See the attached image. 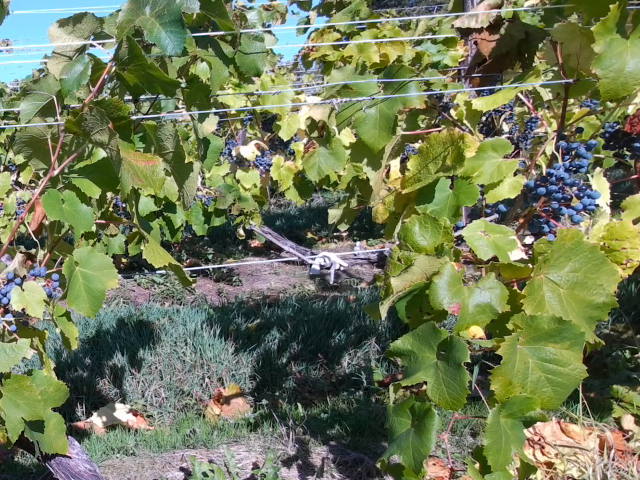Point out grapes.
<instances>
[{
  "instance_id": "01657485",
  "label": "grapes",
  "mask_w": 640,
  "mask_h": 480,
  "mask_svg": "<svg viewBox=\"0 0 640 480\" xmlns=\"http://www.w3.org/2000/svg\"><path fill=\"white\" fill-rule=\"evenodd\" d=\"M598 146L596 140L586 141L583 145L580 141L570 143L569 141H558L557 147L564 150L565 153L562 156L563 163H554L552 168L546 169V175L539 178L540 183H549L547 187L541 184H536L535 180H531L524 183L525 192L531 194L527 197L529 204H537L542 196H551L553 200L550 206L542 209L543 213H547L551 210L554 211L552 219L560 222L561 216H568L573 224H579L582 222V216L578 213L581 210L594 211L596 209L597 199L602 197L600 191H592L585 185L580 184L579 180L570 179V168H575L576 173H586L590 162L594 155V149ZM563 186L576 187L574 197L578 200V204H574L571 207L560 206V203L571 202L573 196L570 193H565Z\"/></svg>"
},
{
  "instance_id": "83cd7487",
  "label": "grapes",
  "mask_w": 640,
  "mask_h": 480,
  "mask_svg": "<svg viewBox=\"0 0 640 480\" xmlns=\"http://www.w3.org/2000/svg\"><path fill=\"white\" fill-rule=\"evenodd\" d=\"M46 272H47V267H40L38 268V264L34 263L33 267L27 271V276L29 278H45L46 277Z\"/></svg>"
},
{
  "instance_id": "b958b902",
  "label": "grapes",
  "mask_w": 640,
  "mask_h": 480,
  "mask_svg": "<svg viewBox=\"0 0 640 480\" xmlns=\"http://www.w3.org/2000/svg\"><path fill=\"white\" fill-rule=\"evenodd\" d=\"M603 129L604 133L599 135L601 140H605L604 144L601 145L603 151L621 150L626 147V150L632 153L630 156L620 152H613L612 156L621 159L629 158L630 160L640 156V133H635L633 137L632 133L621 131L619 122H606L603 124Z\"/></svg>"
},
{
  "instance_id": "f8a65327",
  "label": "grapes",
  "mask_w": 640,
  "mask_h": 480,
  "mask_svg": "<svg viewBox=\"0 0 640 480\" xmlns=\"http://www.w3.org/2000/svg\"><path fill=\"white\" fill-rule=\"evenodd\" d=\"M60 274L58 272H53L50 275V280H51V287H45L44 288V293L46 294V297L48 299L52 298V294H53V289H58L59 285H60Z\"/></svg>"
},
{
  "instance_id": "5460f4e3",
  "label": "grapes",
  "mask_w": 640,
  "mask_h": 480,
  "mask_svg": "<svg viewBox=\"0 0 640 480\" xmlns=\"http://www.w3.org/2000/svg\"><path fill=\"white\" fill-rule=\"evenodd\" d=\"M507 212H508V206L506 204H500L499 202L491 204L485 208V213L487 214L488 217H491L495 213L501 214V213H507Z\"/></svg>"
},
{
  "instance_id": "0513c4c2",
  "label": "grapes",
  "mask_w": 640,
  "mask_h": 480,
  "mask_svg": "<svg viewBox=\"0 0 640 480\" xmlns=\"http://www.w3.org/2000/svg\"><path fill=\"white\" fill-rule=\"evenodd\" d=\"M527 225L533 238L546 236V241L548 243H552L556 240V235L550 232L556 227V224L553 221L548 220L546 217L535 213L531 220L527 222Z\"/></svg>"
},
{
  "instance_id": "84f90ec7",
  "label": "grapes",
  "mask_w": 640,
  "mask_h": 480,
  "mask_svg": "<svg viewBox=\"0 0 640 480\" xmlns=\"http://www.w3.org/2000/svg\"><path fill=\"white\" fill-rule=\"evenodd\" d=\"M6 278L13 283H5L2 288H0V304L8 305L11 299V290L15 288V285H22V278L16 277V274L13 272H7Z\"/></svg>"
}]
</instances>
